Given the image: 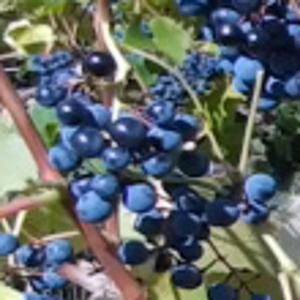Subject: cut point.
Returning a JSON list of instances; mask_svg holds the SVG:
<instances>
[{
  "label": "cut point",
  "mask_w": 300,
  "mask_h": 300,
  "mask_svg": "<svg viewBox=\"0 0 300 300\" xmlns=\"http://www.w3.org/2000/svg\"><path fill=\"white\" fill-rule=\"evenodd\" d=\"M100 29L105 46L117 62V71L120 73L118 78L124 80L130 74L129 69L131 68V65L123 59L119 47L116 44V39L109 33L108 26L105 22L100 24Z\"/></svg>",
  "instance_id": "6a23745f"
}]
</instances>
